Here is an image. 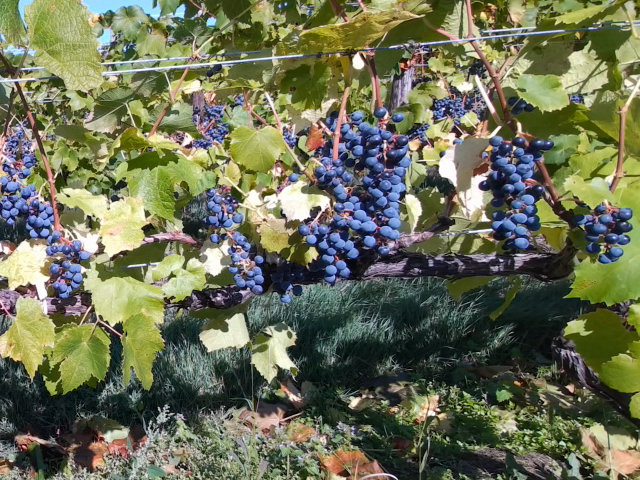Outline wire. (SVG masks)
<instances>
[{"instance_id": "1", "label": "wire", "mask_w": 640, "mask_h": 480, "mask_svg": "<svg viewBox=\"0 0 640 480\" xmlns=\"http://www.w3.org/2000/svg\"><path fill=\"white\" fill-rule=\"evenodd\" d=\"M629 23H630L629 19L601 20V21H592L591 22L592 26H581V27H575V28H561V29H552V30H537L538 29L537 25H513V26L503 27V28L481 30L482 34H489V35H472V36L461 37V38H444L440 40H430V41H422V42L390 43V44L377 45L374 47H364L360 49H328V50L288 53V54H281V55H266V56H259L256 58H238L234 60H214V61H207L202 64L174 63V64L147 66V67H134L131 69L104 71L103 75L116 76V75L133 74L137 72H149V71H156V70L176 69V68L204 69L209 66H216V65H236L241 63H258L261 61L283 60V59H290V58H300V57H310V56H320V55H330V54H362L366 52H376L379 50L392 49V48L424 47V46H432V45H442L446 43H463V42H470L474 40H491V39L515 37V36L554 35V34H567V33L597 31V30H606V29H631L632 27L634 29H640V18L633 19L632 25Z\"/></svg>"}, {"instance_id": "2", "label": "wire", "mask_w": 640, "mask_h": 480, "mask_svg": "<svg viewBox=\"0 0 640 480\" xmlns=\"http://www.w3.org/2000/svg\"><path fill=\"white\" fill-rule=\"evenodd\" d=\"M190 58L189 54H185L182 56H154V57H143V58H132L127 60H116V61H102V66H118V65H129L134 63H145V62H156V61H184Z\"/></svg>"}, {"instance_id": "3", "label": "wire", "mask_w": 640, "mask_h": 480, "mask_svg": "<svg viewBox=\"0 0 640 480\" xmlns=\"http://www.w3.org/2000/svg\"><path fill=\"white\" fill-rule=\"evenodd\" d=\"M261 49H247V50H236L231 52H221V53H203L200 55L201 59L205 58H223V57H234L238 55H250V54H261Z\"/></svg>"}, {"instance_id": "4", "label": "wire", "mask_w": 640, "mask_h": 480, "mask_svg": "<svg viewBox=\"0 0 640 480\" xmlns=\"http://www.w3.org/2000/svg\"><path fill=\"white\" fill-rule=\"evenodd\" d=\"M58 75H41L37 77H27V78H13L9 79H0V84L13 85L15 83H29V82H39L43 80H58Z\"/></svg>"}, {"instance_id": "5", "label": "wire", "mask_w": 640, "mask_h": 480, "mask_svg": "<svg viewBox=\"0 0 640 480\" xmlns=\"http://www.w3.org/2000/svg\"><path fill=\"white\" fill-rule=\"evenodd\" d=\"M493 228H480V229H472V230H460L456 232H440L436 233V238L442 237H458L462 235H474V234H482V233H493Z\"/></svg>"}, {"instance_id": "6", "label": "wire", "mask_w": 640, "mask_h": 480, "mask_svg": "<svg viewBox=\"0 0 640 480\" xmlns=\"http://www.w3.org/2000/svg\"><path fill=\"white\" fill-rule=\"evenodd\" d=\"M159 265H160L159 261H151V262L143 263V264H121L119 266V269L120 270H123V269H126V270H129V269H145V268H150V267L159 266Z\"/></svg>"}]
</instances>
